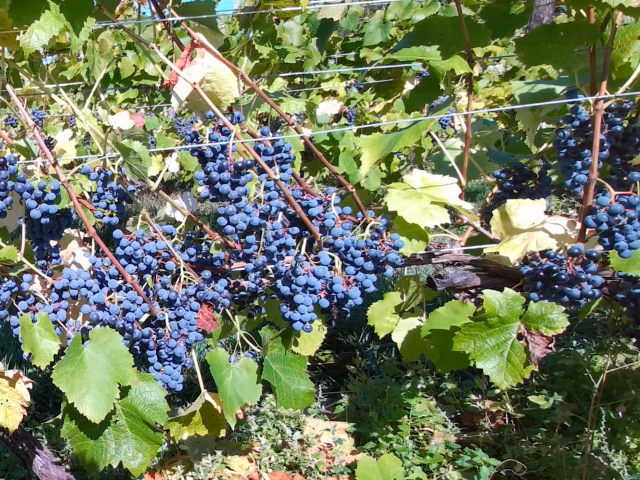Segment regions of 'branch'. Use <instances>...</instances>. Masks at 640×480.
<instances>
[{
	"mask_svg": "<svg viewBox=\"0 0 640 480\" xmlns=\"http://www.w3.org/2000/svg\"><path fill=\"white\" fill-rule=\"evenodd\" d=\"M243 148L254 157L255 161L258 164H260L264 168V170L270 175V177L275 181L276 185L287 197L291 206L294 208L297 214L304 219L306 225L308 226V230L311 232L312 236L315 239H320L321 235L319 231L317 230L315 225L312 224L308 215L300 209L295 199L293 198L292 194L289 193V190L284 186L280 178L272 171V169L266 164V162L260 158V156L257 154V152L253 148H251L248 144H243Z\"/></svg>",
	"mask_w": 640,
	"mask_h": 480,
	"instance_id": "branch-7",
	"label": "branch"
},
{
	"mask_svg": "<svg viewBox=\"0 0 640 480\" xmlns=\"http://www.w3.org/2000/svg\"><path fill=\"white\" fill-rule=\"evenodd\" d=\"M180 25L183 28H185L186 31L192 37H194L195 40L198 41L203 46L204 49H206L208 52L212 53L217 61H219L220 63L226 65L228 68H231L233 71H235L241 77H243L248 82L249 87L254 89L255 92L257 93V95L261 96V98L266 103L270 104V106L273 108L275 113L279 114L281 117H283L286 120V122L292 127L293 130H295L298 133L302 132V129L298 125H296L284 111L279 109L277 104L272 99L268 98L264 91H261V89L253 82V79L251 77H249V75L246 72L241 70L239 67L235 66L233 63H231L228 60H226L223 57H221L220 54L217 52V50L214 49L213 47H211L210 45H208L206 43V41L201 36H199L194 30H192L191 27L185 21H181Z\"/></svg>",
	"mask_w": 640,
	"mask_h": 480,
	"instance_id": "branch-4",
	"label": "branch"
},
{
	"mask_svg": "<svg viewBox=\"0 0 640 480\" xmlns=\"http://www.w3.org/2000/svg\"><path fill=\"white\" fill-rule=\"evenodd\" d=\"M166 30L170 33L171 37L175 40L176 45L178 46V48L181 51L185 50V46L182 44V42L180 41V38L178 37V35L175 33V31L173 30V28L171 27L170 24H164Z\"/></svg>",
	"mask_w": 640,
	"mask_h": 480,
	"instance_id": "branch-17",
	"label": "branch"
},
{
	"mask_svg": "<svg viewBox=\"0 0 640 480\" xmlns=\"http://www.w3.org/2000/svg\"><path fill=\"white\" fill-rule=\"evenodd\" d=\"M105 163L107 164L108 168L111 171L112 174V178L114 180L117 181L118 184H121L123 186V188L126 190L127 195L133 200V206L136 208V210L139 212V214L142 216V218L145 220V222L151 227V229L156 233V235L160 238L161 242L163 244L166 245V247L168 248V250L170 251L171 255L173 256V258L190 274L193 275V277L197 280V281H201L202 277L191 267H189V265L180 258V256L178 255V253L175 251V248L172 246V244L165 238L164 234L160 231V229L154 224V222L152 220H150V218L147 216V214L144 212L143 208L138 204L137 199L133 196V194L128 190V188L125 186V184L123 183L122 179L117 175L116 169L113 168V163L110 160L109 157L105 158Z\"/></svg>",
	"mask_w": 640,
	"mask_h": 480,
	"instance_id": "branch-6",
	"label": "branch"
},
{
	"mask_svg": "<svg viewBox=\"0 0 640 480\" xmlns=\"http://www.w3.org/2000/svg\"><path fill=\"white\" fill-rule=\"evenodd\" d=\"M51 166L54 168V170L57 172L58 174V178L61 182V185L64 189V191L66 192V195L68 197V200L74 205V210L75 213L80 216V218L82 219L83 223H84V227L85 229L89 232V234L91 235V238L93 239V241L95 243H97L102 251V253L108 257V259L111 261V263L114 265L115 269L118 271V273L122 276V278L131 286H133V288L139 293V295L143 298L144 302L147 304L148 308L150 309V312L152 315H158L161 312L160 308H156L154 307L152 301L149 299V297L147 296V294L143 291V289L137 284V281L132 278L127 271L124 269V267L122 266V264L120 263V261L116 258V256L114 255V253L108 249L107 244L105 243V241L98 236V232L96 231V229L92 226L91 224V220L89 218V216L87 215V213L81 208V204L79 203V201L77 200V198L75 197L74 193H73V189L70 187V184L68 182V179L65 175L64 170L61 168V166L59 165L58 162H54L51 163Z\"/></svg>",
	"mask_w": 640,
	"mask_h": 480,
	"instance_id": "branch-1",
	"label": "branch"
},
{
	"mask_svg": "<svg viewBox=\"0 0 640 480\" xmlns=\"http://www.w3.org/2000/svg\"><path fill=\"white\" fill-rule=\"evenodd\" d=\"M96 10L102 14L105 18L109 19L110 21L114 22V21H119L118 18L114 17L113 15L109 14L106 10H104L99 4L95 5Z\"/></svg>",
	"mask_w": 640,
	"mask_h": 480,
	"instance_id": "branch-18",
	"label": "branch"
},
{
	"mask_svg": "<svg viewBox=\"0 0 640 480\" xmlns=\"http://www.w3.org/2000/svg\"><path fill=\"white\" fill-rule=\"evenodd\" d=\"M468 79H469V93H468V98L466 101V110L467 111H471L472 110V100H473V95H474V77L472 73L468 74Z\"/></svg>",
	"mask_w": 640,
	"mask_h": 480,
	"instance_id": "branch-16",
	"label": "branch"
},
{
	"mask_svg": "<svg viewBox=\"0 0 640 480\" xmlns=\"http://www.w3.org/2000/svg\"><path fill=\"white\" fill-rule=\"evenodd\" d=\"M9 66L14 68V69H16L20 73H22L28 79V81L30 83H32L33 85H35L46 97L51 98L54 102H56L58 104L59 107H61L65 111H67L73 118H75L80 123L82 128L89 135L90 140H91L92 144L94 145L95 150L97 152H99V153L104 152V149L102 147H100L98 141L96 140L95 135L100 140H104L105 136L102 135V133L98 129H96L95 126H93L90 122L85 120L80 115V113L78 112L77 108L75 107V105L73 104V102L71 101V99L69 98L67 93L64 92V90L58 84L56 79L52 76V74L50 73V71H49V69L47 67H43L42 71L47 76V79L51 81L53 87L56 89L57 92H59V94L62 96V98L65 100V102L62 101L57 96H55L53 93L48 92V90L44 86H42V84L40 82H38L36 79H34L31 76V74L25 68L21 67L20 65L14 63V62H10Z\"/></svg>",
	"mask_w": 640,
	"mask_h": 480,
	"instance_id": "branch-2",
	"label": "branch"
},
{
	"mask_svg": "<svg viewBox=\"0 0 640 480\" xmlns=\"http://www.w3.org/2000/svg\"><path fill=\"white\" fill-rule=\"evenodd\" d=\"M120 29L125 31L127 34H129L130 36H132L134 39L138 40L139 42L143 43L145 46H147L152 52H154L156 55H158L160 58L163 59V61L165 62V64L172 70H174L176 73H178L179 75H181L182 77H184L189 85L191 86V88L197 92L204 101H206V103L212 107V109L218 114V116L221 118V120L223 121V123L226 125V127L232 132L234 133V135L237 137V139H244V137L242 136V134L230 123V121L228 120V118L224 115V113L219 109V107L208 97L206 96V93L200 89L194 82V80L186 73L184 72L182 69H180L178 66L174 65L169 58L162 53L160 50H158L156 47H154L149 41H147L146 38H143L142 36L138 35L135 31L129 29L127 26H120Z\"/></svg>",
	"mask_w": 640,
	"mask_h": 480,
	"instance_id": "branch-5",
	"label": "branch"
},
{
	"mask_svg": "<svg viewBox=\"0 0 640 480\" xmlns=\"http://www.w3.org/2000/svg\"><path fill=\"white\" fill-rule=\"evenodd\" d=\"M455 7H456L458 15H459L460 24L462 26V30H463V34H464L465 45H466V48H467V51H468L469 67L473 68L474 67L473 49H472L471 42H470V37H469V32H468L467 24H466L465 17H464V12H463V9H462V6H461L459 0L455 1Z\"/></svg>",
	"mask_w": 640,
	"mask_h": 480,
	"instance_id": "branch-13",
	"label": "branch"
},
{
	"mask_svg": "<svg viewBox=\"0 0 640 480\" xmlns=\"http://www.w3.org/2000/svg\"><path fill=\"white\" fill-rule=\"evenodd\" d=\"M302 140L305 142L307 146L310 147L311 150L314 151L316 157L320 160V162L326 165V167L330 171V174L334 178L338 179L341 182V184L348 189V191L351 193V195L354 198V203L357 205V207L361 211L363 218L366 220L367 223H370L371 217L368 215L366 208L363 206L362 201L359 199V196L356 192V188L352 184H350L348 181H346L339 173L335 172V169L333 168V165L330 163V161L322 153H320V150L308 138H302Z\"/></svg>",
	"mask_w": 640,
	"mask_h": 480,
	"instance_id": "branch-10",
	"label": "branch"
},
{
	"mask_svg": "<svg viewBox=\"0 0 640 480\" xmlns=\"http://www.w3.org/2000/svg\"><path fill=\"white\" fill-rule=\"evenodd\" d=\"M163 5H164V7L166 8V10H167L170 14H172V16H173V17L178 16L177 11H176V10H174V9L169 5V3H168L167 1H164V2H163Z\"/></svg>",
	"mask_w": 640,
	"mask_h": 480,
	"instance_id": "branch-20",
	"label": "branch"
},
{
	"mask_svg": "<svg viewBox=\"0 0 640 480\" xmlns=\"http://www.w3.org/2000/svg\"><path fill=\"white\" fill-rule=\"evenodd\" d=\"M292 176L294 177V181L297 185L302 188L308 195H314L315 197L319 196V192L314 190L308 183L296 172H292Z\"/></svg>",
	"mask_w": 640,
	"mask_h": 480,
	"instance_id": "branch-15",
	"label": "branch"
},
{
	"mask_svg": "<svg viewBox=\"0 0 640 480\" xmlns=\"http://www.w3.org/2000/svg\"><path fill=\"white\" fill-rule=\"evenodd\" d=\"M471 116L466 117V127H465V141H464V160L462 164V175L466 180L467 175V166L469 163V143L471 138Z\"/></svg>",
	"mask_w": 640,
	"mask_h": 480,
	"instance_id": "branch-14",
	"label": "branch"
},
{
	"mask_svg": "<svg viewBox=\"0 0 640 480\" xmlns=\"http://www.w3.org/2000/svg\"><path fill=\"white\" fill-rule=\"evenodd\" d=\"M621 19H622V12L618 11L616 19L614 21L613 28H612L611 33H610V35L608 37V40H607L606 48H605V55H604V60H603V69H602V75H601V87H600V90H599V95H604L605 90H606L607 73H608V69H609L610 50H611V47H612V43H613L614 37H615L616 32L618 30L619 24L621 22Z\"/></svg>",
	"mask_w": 640,
	"mask_h": 480,
	"instance_id": "branch-11",
	"label": "branch"
},
{
	"mask_svg": "<svg viewBox=\"0 0 640 480\" xmlns=\"http://www.w3.org/2000/svg\"><path fill=\"white\" fill-rule=\"evenodd\" d=\"M152 6L157 10L158 15L162 18H166V14L163 12L161 6L157 3L156 0H151Z\"/></svg>",
	"mask_w": 640,
	"mask_h": 480,
	"instance_id": "branch-19",
	"label": "branch"
},
{
	"mask_svg": "<svg viewBox=\"0 0 640 480\" xmlns=\"http://www.w3.org/2000/svg\"><path fill=\"white\" fill-rule=\"evenodd\" d=\"M595 105V117L593 122V136H592V166L589 169V180L587 182V186L584 188V198H583V208L581 212V216L578 219L582 223V228L578 232V237L576 241L580 244H584L586 242V226H585V217L589 213L593 201H594V184L597 181V161L599 158V138L601 134V119H602V106L605 104L604 100L593 101Z\"/></svg>",
	"mask_w": 640,
	"mask_h": 480,
	"instance_id": "branch-3",
	"label": "branch"
},
{
	"mask_svg": "<svg viewBox=\"0 0 640 480\" xmlns=\"http://www.w3.org/2000/svg\"><path fill=\"white\" fill-rule=\"evenodd\" d=\"M148 185L153 188L156 192L160 193L162 195V197L169 202V204L174 207L178 212H180L181 214H183L184 217H186L190 222L198 225L199 227H201L207 234L209 237H211L214 241H218L219 243L231 246L232 248L238 250V251H242L243 247L238 245L237 243H234L231 240H227L225 238H222L221 236H217L205 223H203L202 221L198 220L197 218H194L189 212H187L185 209H183L181 206H179L170 196H168V194L165 192L164 189L160 188L159 186H157L152 180L148 181Z\"/></svg>",
	"mask_w": 640,
	"mask_h": 480,
	"instance_id": "branch-8",
	"label": "branch"
},
{
	"mask_svg": "<svg viewBox=\"0 0 640 480\" xmlns=\"http://www.w3.org/2000/svg\"><path fill=\"white\" fill-rule=\"evenodd\" d=\"M3 90L9 96L10 100L12 101L16 109L20 112L25 122L28 124L30 134L33 136L35 142L37 143V146L39 147L43 155L46 158L54 157V155L50 152V150L47 148L46 144L44 143L41 135L38 133L36 128V123L32 120L31 116L29 115L25 107L21 104L15 92L10 88V84L8 82H5L3 84Z\"/></svg>",
	"mask_w": 640,
	"mask_h": 480,
	"instance_id": "branch-9",
	"label": "branch"
},
{
	"mask_svg": "<svg viewBox=\"0 0 640 480\" xmlns=\"http://www.w3.org/2000/svg\"><path fill=\"white\" fill-rule=\"evenodd\" d=\"M589 94L591 96H595L597 94V74H596V65H597V57H596V46L591 44L589 46Z\"/></svg>",
	"mask_w": 640,
	"mask_h": 480,
	"instance_id": "branch-12",
	"label": "branch"
}]
</instances>
